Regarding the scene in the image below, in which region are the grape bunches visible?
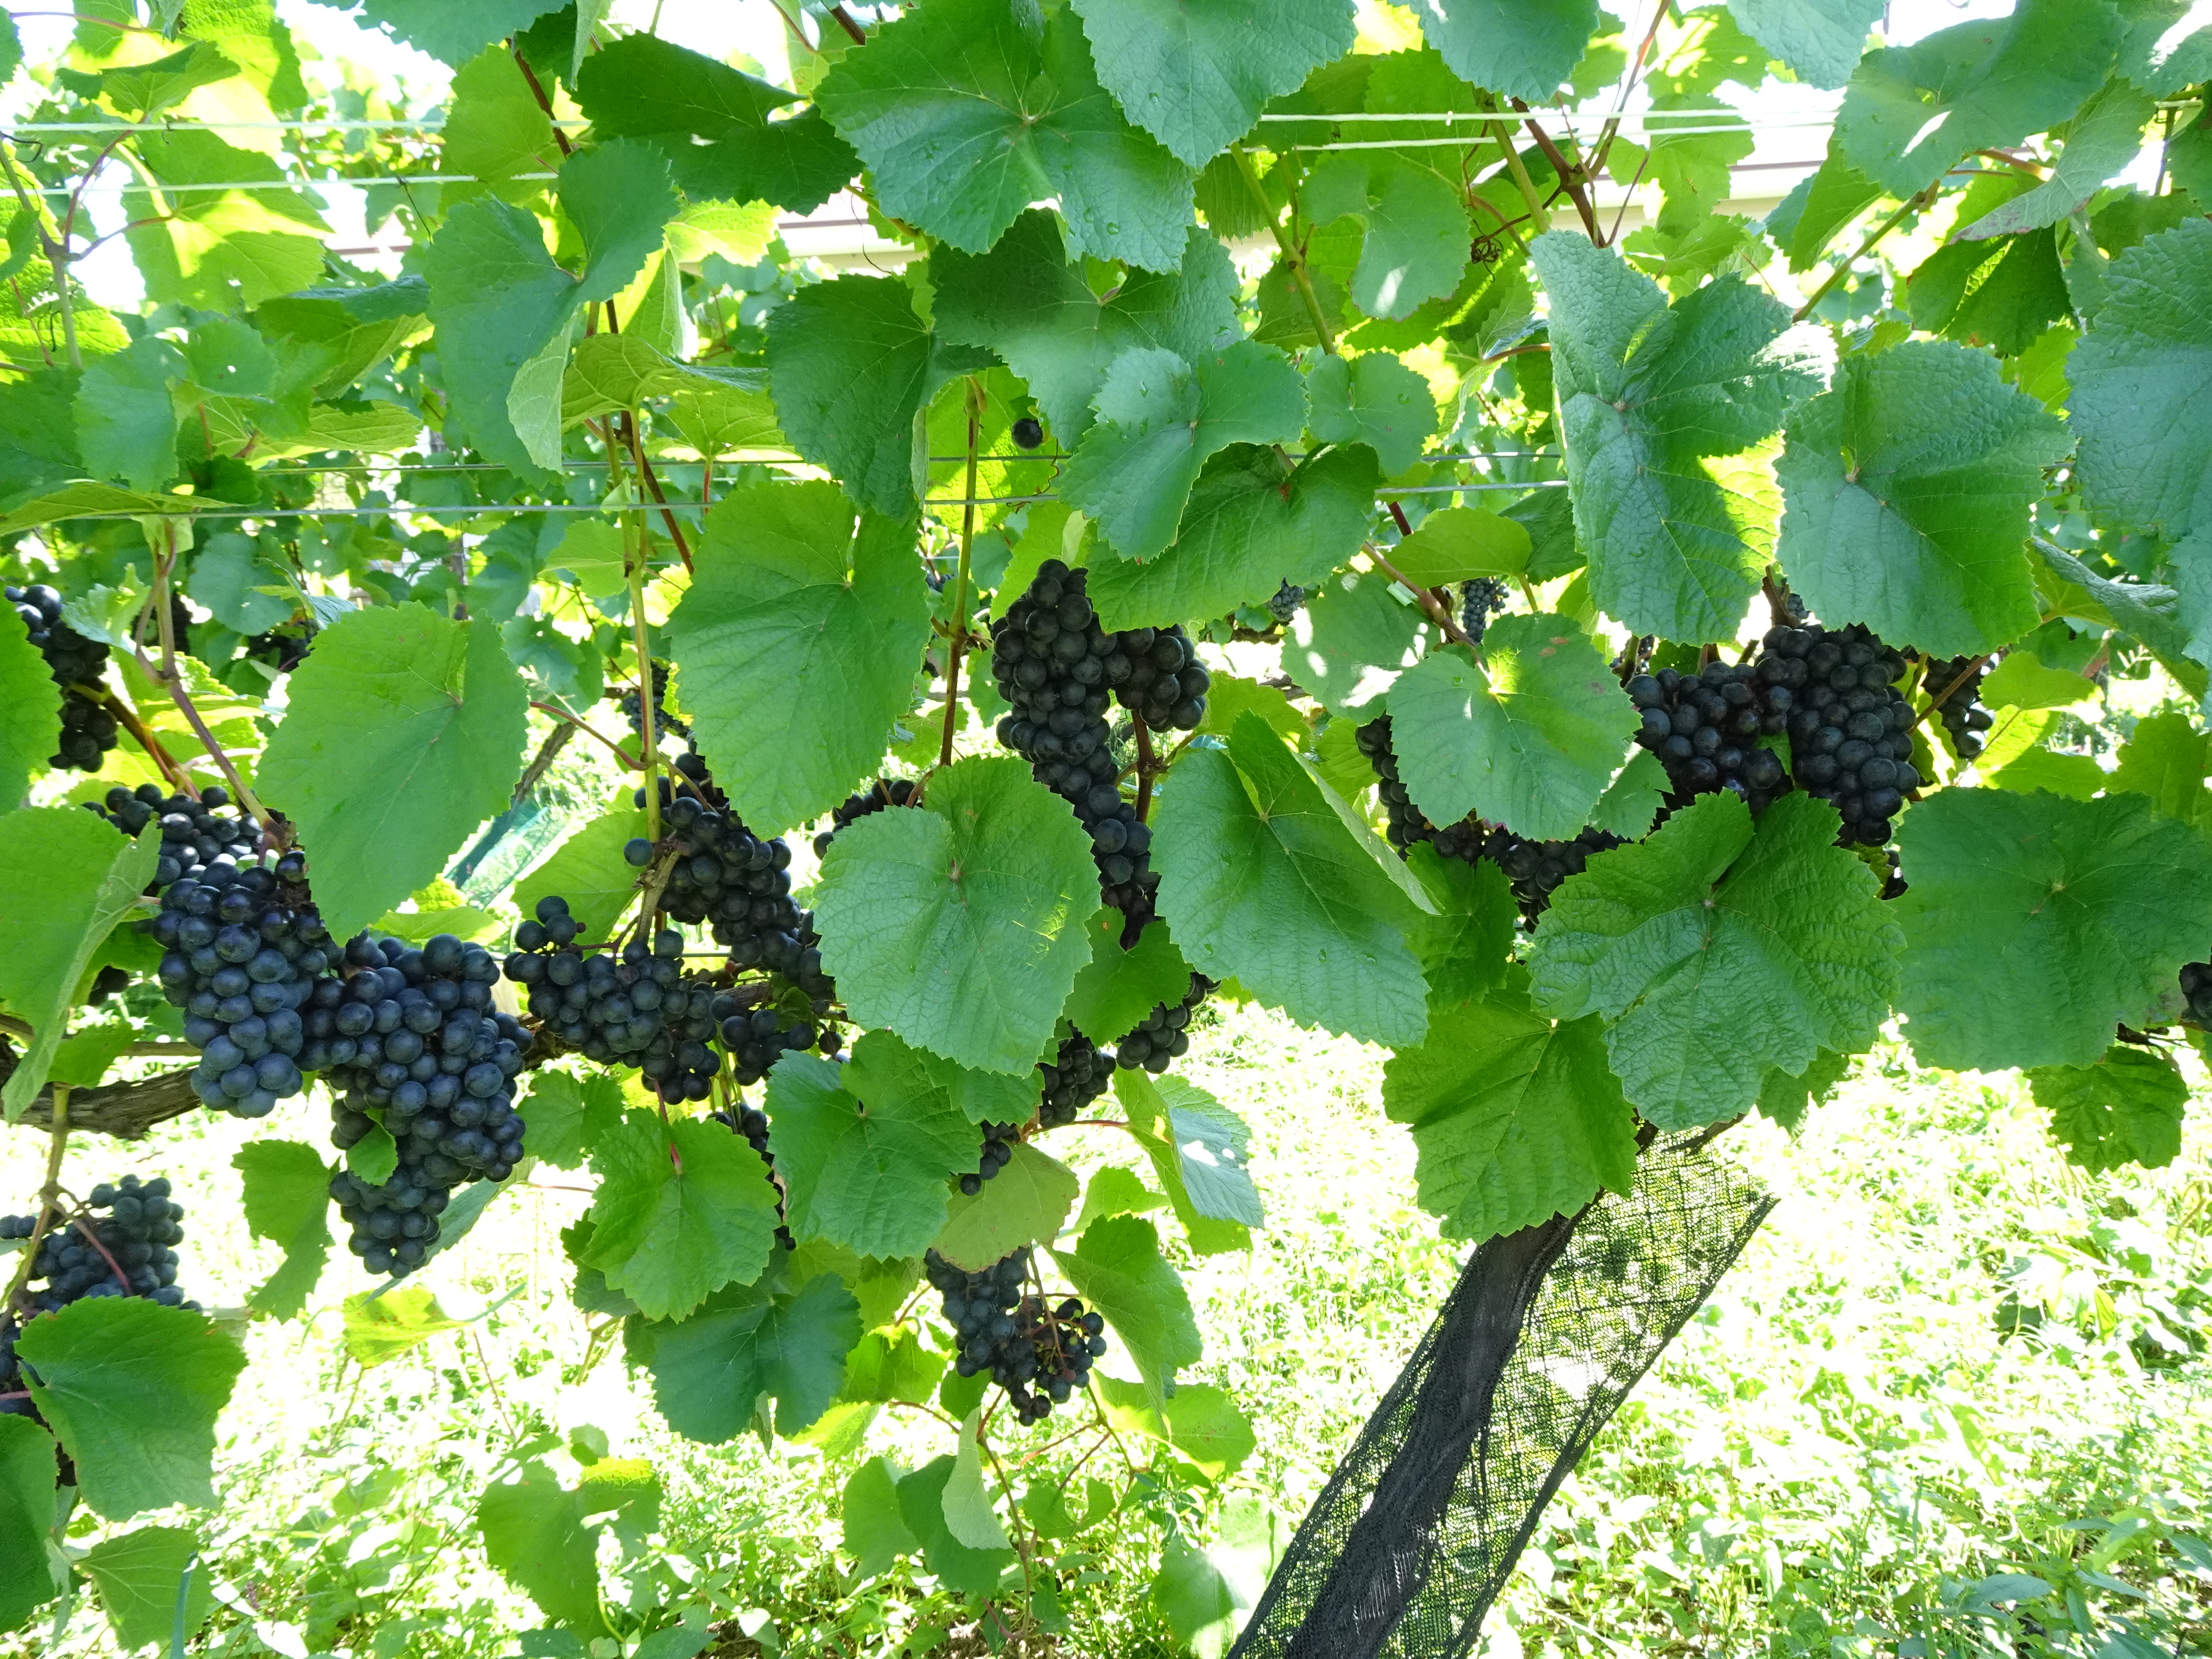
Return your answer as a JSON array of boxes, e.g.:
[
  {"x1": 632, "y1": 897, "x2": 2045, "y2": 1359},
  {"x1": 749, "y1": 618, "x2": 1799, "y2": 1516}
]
[
  {"x1": 504, "y1": 896, "x2": 615, "y2": 1064},
  {"x1": 589, "y1": 927, "x2": 684, "y2": 1052},
  {"x1": 79, "y1": 784, "x2": 188, "y2": 1005},
  {"x1": 293, "y1": 937, "x2": 529, "y2": 1278},
  {"x1": 0, "y1": 1311, "x2": 78, "y2": 1488},
  {"x1": 1101, "y1": 882, "x2": 1222, "y2": 1073},
  {"x1": 1355, "y1": 708, "x2": 1483, "y2": 867},
  {"x1": 997, "y1": 715, "x2": 1162, "y2": 890},
  {"x1": 992, "y1": 1297, "x2": 1105, "y2": 1426},
  {"x1": 1623, "y1": 658, "x2": 1792, "y2": 820},
  {"x1": 150, "y1": 852, "x2": 368, "y2": 1120},
  {"x1": 624, "y1": 739, "x2": 800, "y2": 971},
  {"x1": 624, "y1": 979, "x2": 720, "y2": 1103},
  {"x1": 948, "y1": 1118, "x2": 1020, "y2": 1195},
  {"x1": 705, "y1": 1104, "x2": 796, "y2": 1250},
  {"x1": 4, "y1": 584, "x2": 118, "y2": 772},
  {"x1": 786, "y1": 778, "x2": 923, "y2": 992},
  {"x1": 990, "y1": 560, "x2": 1131, "y2": 737},
  {"x1": 1903, "y1": 644, "x2": 1995, "y2": 760},
  {"x1": 2178, "y1": 955, "x2": 2212, "y2": 1020},
  {"x1": 1038, "y1": 1020, "x2": 1116, "y2": 1128},
  {"x1": 1754, "y1": 614, "x2": 1919, "y2": 849},
  {"x1": 1483, "y1": 824, "x2": 1634, "y2": 934},
  {"x1": 709, "y1": 995, "x2": 841, "y2": 1086},
  {"x1": 923, "y1": 1244, "x2": 1030, "y2": 1377},
  {"x1": 1864, "y1": 850, "x2": 1908, "y2": 900},
  {"x1": 0, "y1": 1174, "x2": 202, "y2": 1328},
  {"x1": 128, "y1": 787, "x2": 265, "y2": 887},
  {"x1": 1109, "y1": 623, "x2": 1209, "y2": 732}
]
